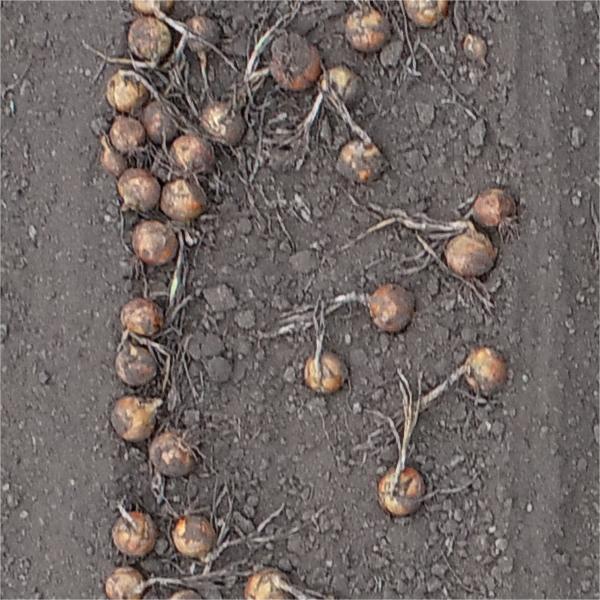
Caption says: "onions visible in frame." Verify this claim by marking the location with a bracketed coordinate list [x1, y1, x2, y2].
[107, 72, 145, 110]
[336, 137, 382, 182]
[269, 33, 321, 89]
[445, 230, 492, 276]
[97, 141, 124, 176]
[188, 15, 216, 46]
[152, 432, 197, 475]
[128, 19, 169, 60]
[171, 514, 216, 556]
[170, 590, 202, 600]
[129, 221, 175, 263]
[128, 0, 163, 18]
[104, 566, 142, 599]
[159, 177, 204, 219]
[463, 345, 506, 392]
[344, 3, 388, 50]
[140, 102, 175, 139]
[113, 510, 153, 555]
[376, 463, 424, 514]
[115, 338, 155, 382]
[170, 132, 209, 170]
[462, 33, 487, 60]
[111, 115, 144, 151]
[368, 283, 413, 332]
[405, 0, 445, 28]
[472, 188, 509, 230]
[119, 170, 159, 212]
[111, 396, 157, 440]
[120, 298, 162, 335]
[323, 65, 361, 101]
[248, 569, 304, 599]
[301, 350, 345, 391]
[200, 101, 245, 142]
